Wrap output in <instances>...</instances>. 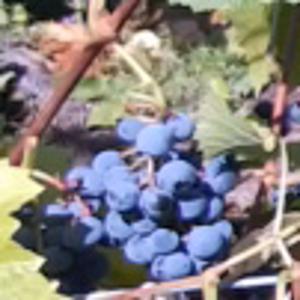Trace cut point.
<instances>
[{
  "label": "cut point",
  "instance_id": "cut-point-1",
  "mask_svg": "<svg viewBox=\"0 0 300 300\" xmlns=\"http://www.w3.org/2000/svg\"><path fill=\"white\" fill-rule=\"evenodd\" d=\"M109 45L115 48L124 57L127 63L140 74L142 79L149 84L156 101L160 105H163L165 103V99L158 81L149 76L147 71L136 60H134L131 54L118 41L112 39Z\"/></svg>",
  "mask_w": 300,
  "mask_h": 300
}]
</instances>
